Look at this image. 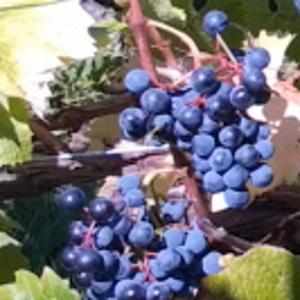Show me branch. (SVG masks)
Wrapping results in <instances>:
<instances>
[{
    "label": "branch",
    "mask_w": 300,
    "mask_h": 300,
    "mask_svg": "<svg viewBox=\"0 0 300 300\" xmlns=\"http://www.w3.org/2000/svg\"><path fill=\"white\" fill-rule=\"evenodd\" d=\"M127 25L136 37L137 54L141 67L149 73L152 83L158 85L143 0H129Z\"/></svg>",
    "instance_id": "branch-2"
},
{
    "label": "branch",
    "mask_w": 300,
    "mask_h": 300,
    "mask_svg": "<svg viewBox=\"0 0 300 300\" xmlns=\"http://www.w3.org/2000/svg\"><path fill=\"white\" fill-rule=\"evenodd\" d=\"M170 146L176 170L188 189V195L196 214V223L202 234L214 247L237 254H247L253 249L250 241L228 232L219 225L212 224L210 214L205 208L198 183L194 178L187 156L178 146L174 144Z\"/></svg>",
    "instance_id": "branch-1"
}]
</instances>
